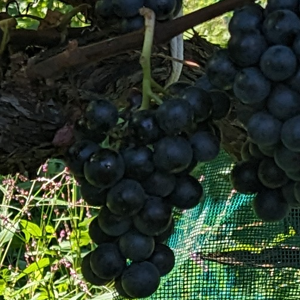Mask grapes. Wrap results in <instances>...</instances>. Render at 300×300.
<instances>
[{"label": "grapes", "mask_w": 300, "mask_h": 300, "mask_svg": "<svg viewBox=\"0 0 300 300\" xmlns=\"http://www.w3.org/2000/svg\"><path fill=\"white\" fill-rule=\"evenodd\" d=\"M228 30L227 49L211 56L195 86L168 85L150 108L137 91L115 105L95 99L75 121L78 141L65 162L83 199L103 206L89 227L99 246L81 263L89 284L114 279L126 298L159 287L175 264L162 244L175 229L171 205L200 203L202 186L188 173L218 155L222 131L214 120L231 110L250 138L232 169L233 187L258 191L253 208L268 223L282 221L289 204L300 206V0L240 5Z\"/></svg>", "instance_id": "obj_1"}]
</instances>
